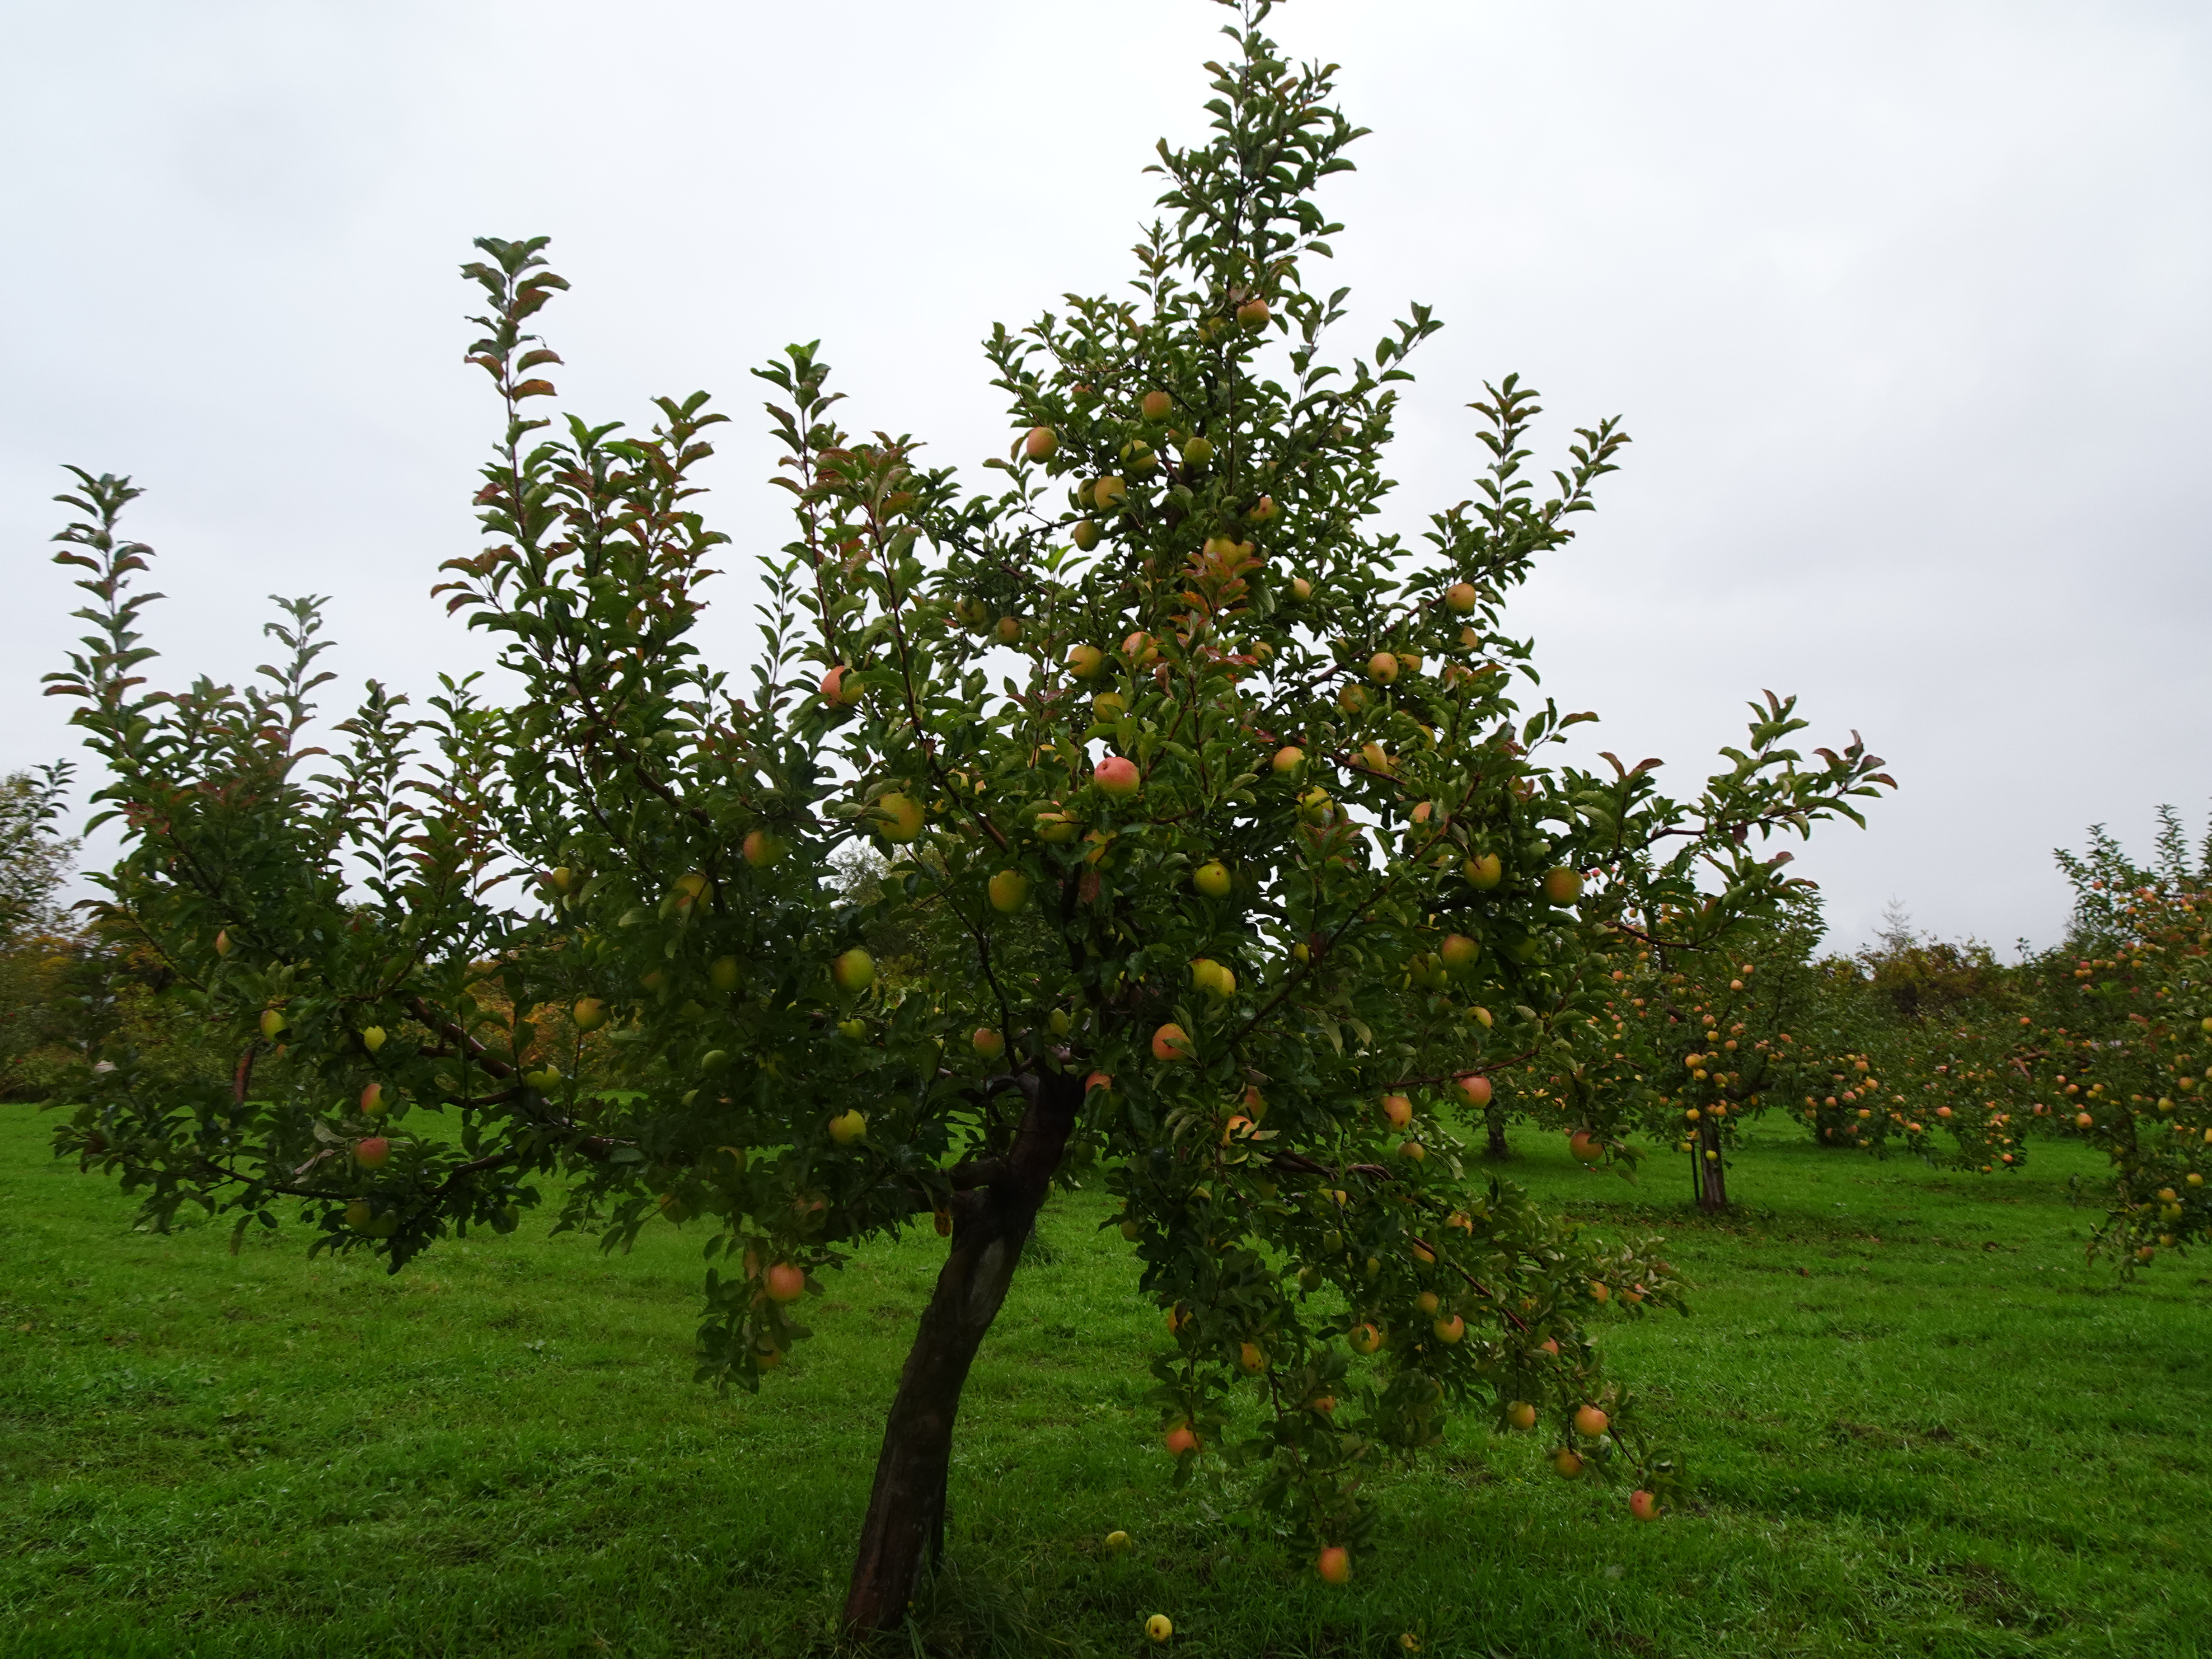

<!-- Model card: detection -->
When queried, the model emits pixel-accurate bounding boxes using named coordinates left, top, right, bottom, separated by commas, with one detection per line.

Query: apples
left=361, top=1083, right=393, bottom=1118
left=1445, top=665, right=1473, bottom=683
left=1038, top=801, right=1074, bottom=845
left=1445, top=1216, right=1472, bottom=1236
left=1413, top=1243, right=1437, bottom=1263
left=1429, top=970, right=1448, bottom=992
left=833, top=949, right=875, bottom=994
left=1027, top=744, right=1065, bottom=768
left=1027, top=426, right=1058, bottom=465
left=1220, top=965, right=1235, bottom=999
left=1092, top=692, right=1125, bottom=724
left=743, top=829, right=786, bottom=868
left=1168, top=427, right=1182, bottom=439
left=795, top=1198, right=825, bottom=1210
left=1198, top=317, right=1223, bottom=344
left=1367, top=652, right=1398, bottom=688
left=1541, top=1337, right=1559, bottom=1355
left=1408, top=953, right=1443, bottom=986
left=1445, top=583, right=1476, bottom=615
left=829, top=1108, right=867, bottom=1146
left=1086, top=1070, right=1111, bottom=1095
left=1072, top=384, right=1091, bottom=393
left=1188, top=1186, right=1212, bottom=1201
left=764, top=1263, right=805, bottom=1304
left=1193, top=861, right=1231, bottom=901
left=680, top=1089, right=698, bottom=1106
left=1250, top=1171, right=1277, bottom=1199
left=1203, top=538, right=1238, bottom=569
left=973, top=1027, right=1004, bottom=1060
left=1416, top=724, right=1435, bottom=751
left=1221, top=1115, right=1260, bottom=1146
left=1373, top=1095, right=1412, bottom=1133
left=1183, top=959, right=1223, bottom=995
left=1507, top=1402, right=1535, bottom=1430
left=1455, top=1074, right=1492, bottom=1108
left=1542, top=865, right=1584, bottom=908
left=1349, top=741, right=1387, bottom=780
left=673, top=872, right=715, bottom=913
left=701, top=1050, right=732, bottom=1080
left=1295, top=785, right=1333, bottom=828
left=551, top=866, right=570, bottom=895
left=1347, top=1322, right=1379, bottom=1355
left=1184, top=437, right=1213, bottom=468
left=1625, top=1283, right=1643, bottom=1303
left=1119, top=1220, right=1142, bottom=1243
left=955, top=595, right=987, bottom=628
left=522, top=1064, right=561, bottom=1099
left=1251, top=641, right=1273, bottom=660
left=1120, top=439, right=1158, bottom=473
left=1412, top=802, right=1447, bottom=834
left=1250, top=497, right=1280, bottom=522
left=821, top=665, right=864, bottom=708
left=996, top=616, right=1023, bottom=647
left=1332, top=637, right=1350, bottom=664
left=948, top=767, right=985, bottom=795
left=707, top=955, right=743, bottom=992
left=1168, top=1428, right=1199, bottom=1458
left=1121, top=631, right=1158, bottom=660
left=345, top=1196, right=372, bottom=1233
left=1236, top=539, right=1254, bottom=559
left=746, top=1330, right=782, bottom=1371
left=1152, top=1023, right=1191, bottom=1061
left=1272, top=746, right=1306, bottom=773
left=1554, top=1447, right=1584, bottom=1480
left=1068, top=645, right=1104, bottom=677
left=1458, top=625, right=1478, bottom=647
left=1338, top=684, right=1367, bottom=715
left=1317, top=1188, right=1346, bottom=1207
left=1293, top=941, right=1315, bottom=966
left=1396, top=1143, right=1425, bottom=1169
left=712, top=1146, right=748, bottom=1175
left=1386, top=755, right=1403, bottom=777
left=1317, top=1547, right=1351, bottom=1583
left=1074, top=520, right=1100, bottom=551
left=1083, top=828, right=1118, bottom=871
left=1461, top=1006, right=1492, bottom=1029
left=1629, top=1490, right=1660, bottom=1521
left=1383, top=962, right=1411, bottom=993
left=837, top=1019, right=868, bottom=1046
left=367, top=1210, right=403, bottom=1238
left=641, top=966, right=672, bottom=993
left=1415, top=1292, right=1439, bottom=1315
left=1314, top=1385, right=1335, bottom=1412
left=1168, top=1301, right=1193, bottom=1337
left=358, top=1025, right=387, bottom=1052
left=1240, top=1342, right=1263, bottom=1378
left=1324, top=1230, right=1344, bottom=1254
left=1077, top=479, right=1101, bottom=508
left=1093, top=757, right=1140, bottom=799
left=1392, top=647, right=1422, bottom=671
left=1570, top=1130, right=1603, bottom=1164
left=661, top=1194, right=691, bottom=1224
left=355, top=1137, right=390, bottom=1171
left=1093, top=476, right=1127, bottom=511
left=216, top=924, right=239, bottom=957
left=1284, top=578, right=1311, bottom=604
left=1044, top=1007, right=1067, bottom=1045
left=1441, top=934, right=1479, bottom=973
left=1433, top=1314, right=1464, bottom=1345
left=1574, top=1404, right=1607, bottom=1438
left=583, top=935, right=611, bottom=965
left=1297, top=1265, right=1323, bottom=1292
left=1589, top=1281, right=1608, bottom=1302
left=1462, top=852, right=1501, bottom=890
left=260, top=1008, right=302, bottom=1043
left=1141, top=391, right=1173, bottom=423
left=878, top=792, right=925, bottom=844
left=573, top=996, right=609, bottom=1031
left=1243, top=1084, right=1268, bottom=1124
left=1236, top=299, right=1270, bottom=334
left=989, top=869, right=1030, bottom=913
